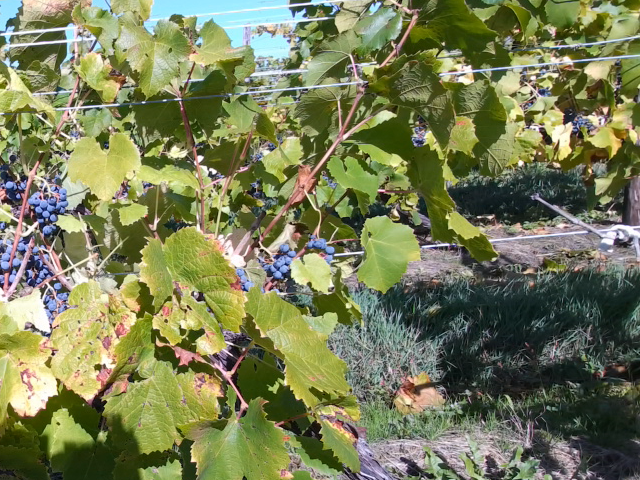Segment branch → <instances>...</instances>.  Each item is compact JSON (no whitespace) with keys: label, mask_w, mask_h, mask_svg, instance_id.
Wrapping results in <instances>:
<instances>
[{"label":"branch","mask_w":640,"mask_h":480,"mask_svg":"<svg viewBox=\"0 0 640 480\" xmlns=\"http://www.w3.org/2000/svg\"><path fill=\"white\" fill-rule=\"evenodd\" d=\"M38 237H39L40 241H41L42 243H44V244H45L46 248H47L48 250H50V253H51V256H52L53 262H54V264H55L56 268H57V269H58V271H59V272H58V273H56L54 276H52V277H50V278H48V279H45V280L41 281V282L37 285V289H38V290H41L43 286H45V285H47V284H50V283H52V282L56 281V280H57V279H59L61 276H63L64 274H66L68 271H71L73 268L78 267V266H80V265H82V264H84V263H86V262H88V261H90V260H91V257H90V256H85V257L81 258L80 260L75 261V262H73V263H70L68 266H66L65 268H63V267H62V265L60 264L59 260H58L57 253H56V251H55L54 249H52V245H51V243L49 242V240H48V239H46V238L44 237V235H43V233H42V232H39V233H38Z\"/></svg>","instance_id":"45aa463d"},{"label":"branch","mask_w":640,"mask_h":480,"mask_svg":"<svg viewBox=\"0 0 640 480\" xmlns=\"http://www.w3.org/2000/svg\"><path fill=\"white\" fill-rule=\"evenodd\" d=\"M79 81H80V75L76 74L72 84V93L70 94V97L66 103V106H72V103L77 93V87H78Z\"/></svg>","instance_id":"1ff4a987"},{"label":"branch","mask_w":640,"mask_h":480,"mask_svg":"<svg viewBox=\"0 0 640 480\" xmlns=\"http://www.w3.org/2000/svg\"><path fill=\"white\" fill-rule=\"evenodd\" d=\"M368 87V85H361L360 89L358 90L357 96L354 99V101L352 102V104L350 105L349 111L347 113L346 118L344 119L341 127L339 128L337 135L335 136V138L333 139V142L331 143L329 149L326 151V153L320 158V160L317 162L316 166L314 167V169L312 170V172L306 177V179L304 180V182L299 185L295 191L291 194V196L289 197L287 203L285 204V206L281 209V211L274 217V219L269 223L268 227L266 228V230L263 232L262 235H260L252 244L251 246L248 247L247 249V253L251 254L252 251L269 235V233L271 232V230L273 229V227L276 225V223L285 215V213L287 212V210L290 208V206L293 204V201L295 200V198L299 195V193L307 187V185L310 183V181L315 177V175L318 173V171L320 170V168L322 167L323 163L331 156V154L334 152L335 147L337 146L340 138L342 137V134L344 133L347 125L349 124L354 110L356 108V106L358 105L359 101L362 99V96L366 90V88Z\"/></svg>","instance_id":"30e6481e"},{"label":"branch","mask_w":640,"mask_h":480,"mask_svg":"<svg viewBox=\"0 0 640 480\" xmlns=\"http://www.w3.org/2000/svg\"><path fill=\"white\" fill-rule=\"evenodd\" d=\"M417 16H418V10H417V9H414V10H413L412 17L410 18V21H409V23H408L407 27L405 28V30H404V32H403V36H402L401 42L396 46V48H395V49H394L390 54H388V55H387V57H386V58H384V59L380 62V65H381V66H385V65H386L389 61H391V60H392V58H393L394 56H396V55L399 53V51H400V50L405 46L406 41H407V38H408V34H409V32L412 30L413 25L415 24V21H416V19H417Z\"/></svg>","instance_id":"982ccf7c"},{"label":"branch","mask_w":640,"mask_h":480,"mask_svg":"<svg viewBox=\"0 0 640 480\" xmlns=\"http://www.w3.org/2000/svg\"><path fill=\"white\" fill-rule=\"evenodd\" d=\"M179 107H180V112H181L183 121H184L185 126H186V131H187L188 138H189V146H190L191 154H192V157H193V161L195 163L196 178H197L199 189H200V200H199V206H200V231L204 232L205 231V203H204L205 202V187H204V183H203V178L201 176L200 161L198 159V155H197V152H196L195 143H194V135H193V132H192L190 120H189L188 115L186 113L184 102H179Z\"/></svg>","instance_id":"170604dd"},{"label":"branch","mask_w":640,"mask_h":480,"mask_svg":"<svg viewBox=\"0 0 640 480\" xmlns=\"http://www.w3.org/2000/svg\"><path fill=\"white\" fill-rule=\"evenodd\" d=\"M45 156L44 152H40L38 157L34 160L33 162V167L32 170L30 171V175L28 178V182H27V187L26 190H21L20 191V196H21V204H20V214H19V219L17 221V227H16V232L14 235V244H13V250L11 252V259H10V269L9 270H5L3 277H4V282H3V291L7 292L8 291V284H9V279H10V271L12 269V258L15 257V252H16V247H17V243L21 234V230H22V224L24 222V217H25V208L27 210V213L30 216V220L32 223L36 222V218H35V214L34 211L31 208V205L28 204V198L29 195L31 193V189H32V184L34 181V177L35 174L37 172L38 169V165L41 162V160L43 159V157Z\"/></svg>","instance_id":"325d2c04"},{"label":"branch","mask_w":640,"mask_h":480,"mask_svg":"<svg viewBox=\"0 0 640 480\" xmlns=\"http://www.w3.org/2000/svg\"><path fill=\"white\" fill-rule=\"evenodd\" d=\"M67 115H68V111H63V112H62V114H61V116H60V118H59V121H58V123H57V125H56V127H55V133H56V134H59V133H60L61 127H62V125H63V123H64L65 118H66V116H67Z\"/></svg>","instance_id":"ea751061"}]
</instances>
